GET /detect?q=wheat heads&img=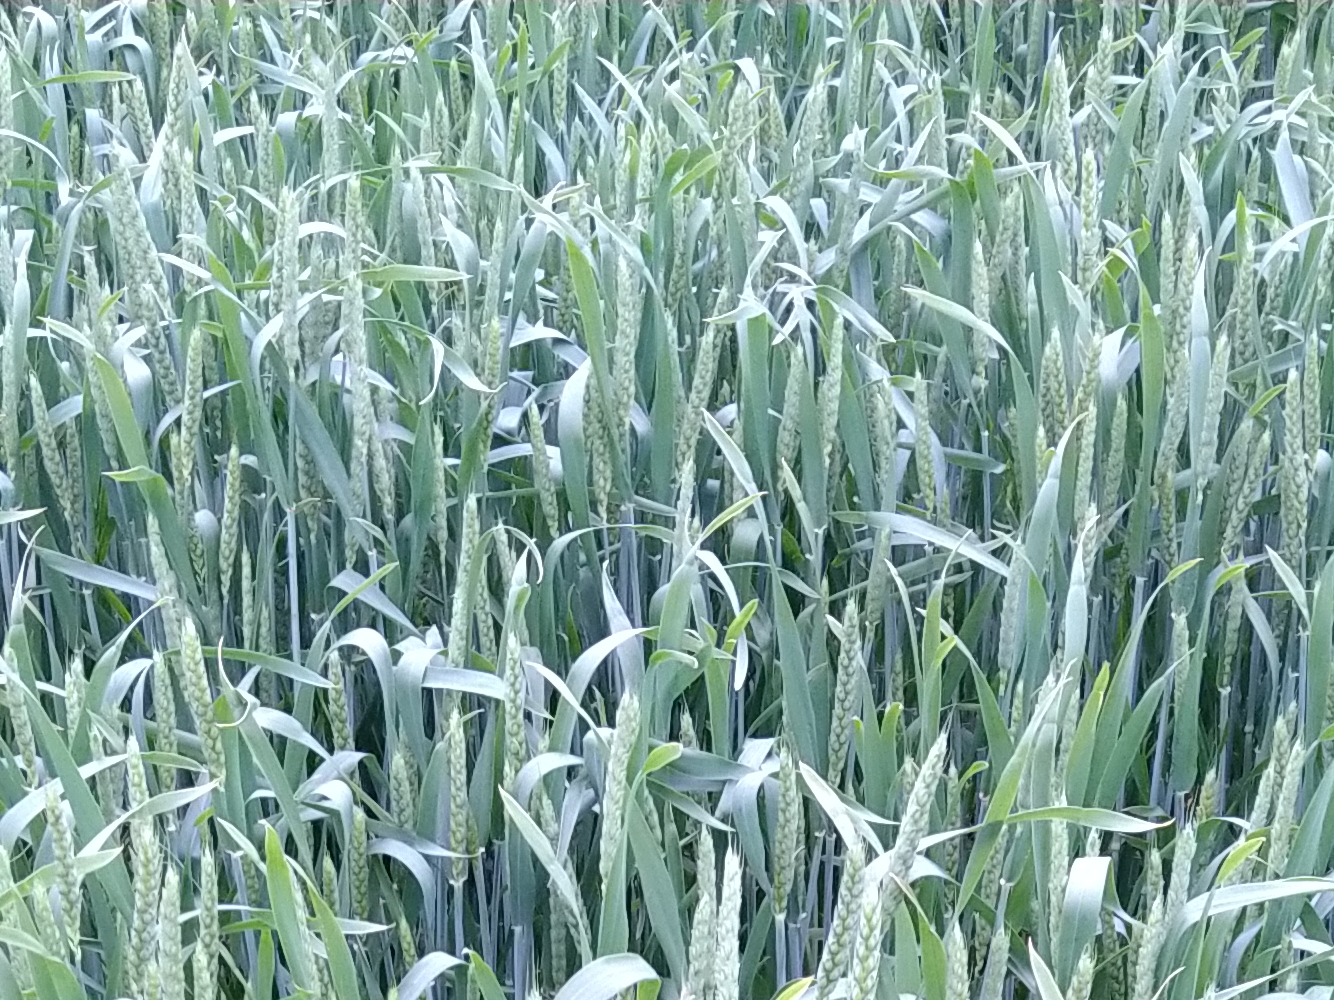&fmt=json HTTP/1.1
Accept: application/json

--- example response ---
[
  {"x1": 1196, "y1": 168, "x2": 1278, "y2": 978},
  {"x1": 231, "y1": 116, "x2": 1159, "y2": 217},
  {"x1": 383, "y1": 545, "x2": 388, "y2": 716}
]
[
  {"x1": 1053, "y1": 59, "x2": 1077, "y2": 188},
  {"x1": 1110, "y1": 554, "x2": 1124, "y2": 604},
  {"x1": 770, "y1": 90, "x2": 785, "y2": 151},
  {"x1": 351, "y1": 808, "x2": 369, "y2": 919},
  {"x1": 200, "y1": 852, "x2": 219, "y2": 965},
  {"x1": 139, "y1": 289, "x2": 182, "y2": 409},
  {"x1": 160, "y1": 868, "x2": 187, "y2": 1000},
  {"x1": 714, "y1": 286, "x2": 733, "y2": 376},
  {"x1": 641, "y1": 783, "x2": 662, "y2": 846},
  {"x1": 658, "y1": 120, "x2": 673, "y2": 162},
  {"x1": 1122, "y1": 493, "x2": 1154, "y2": 572},
  {"x1": 416, "y1": 182, "x2": 436, "y2": 296},
  {"x1": 1076, "y1": 336, "x2": 1102, "y2": 416},
  {"x1": 186, "y1": 10, "x2": 198, "y2": 41},
  {"x1": 346, "y1": 179, "x2": 362, "y2": 274},
  {"x1": 376, "y1": 388, "x2": 391, "y2": 447},
  {"x1": 159, "y1": 49, "x2": 188, "y2": 140},
  {"x1": 821, "y1": 447, "x2": 842, "y2": 509},
  {"x1": 391, "y1": 755, "x2": 414, "y2": 830},
  {"x1": 1160, "y1": 211, "x2": 1175, "y2": 336},
  {"x1": 1314, "y1": 227, "x2": 1332, "y2": 294},
  {"x1": 398, "y1": 918, "x2": 424, "y2": 1000},
  {"x1": 528, "y1": 403, "x2": 560, "y2": 534},
  {"x1": 1121, "y1": 0, "x2": 1135, "y2": 60},
  {"x1": 120, "y1": 81, "x2": 139, "y2": 127},
  {"x1": 1049, "y1": 818, "x2": 1068, "y2": 936},
  {"x1": 421, "y1": 114, "x2": 434, "y2": 153},
  {"x1": 180, "y1": 150, "x2": 199, "y2": 292},
  {"x1": 1194, "y1": 772, "x2": 1219, "y2": 865},
  {"x1": 915, "y1": 376, "x2": 934, "y2": 507},
  {"x1": 565, "y1": 0, "x2": 581, "y2": 62},
  {"x1": 327, "y1": 654, "x2": 354, "y2": 768},
  {"x1": 1010, "y1": 197, "x2": 1025, "y2": 327},
  {"x1": 576, "y1": 172, "x2": 590, "y2": 239},
  {"x1": 867, "y1": 528, "x2": 891, "y2": 626},
  {"x1": 66, "y1": 418, "x2": 85, "y2": 528},
  {"x1": 343, "y1": 278, "x2": 364, "y2": 360},
  {"x1": 941, "y1": 929, "x2": 970, "y2": 1000},
  {"x1": 1028, "y1": 0, "x2": 1043, "y2": 75},
  {"x1": 834, "y1": 879, "x2": 882, "y2": 1000},
  {"x1": 790, "y1": 98, "x2": 818, "y2": 201},
  {"x1": 971, "y1": 240, "x2": 991, "y2": 374},
  {"x1": 601, "y1": 694, "x2": 641, "y2": 881},
  {"x1": 0, "y1": 846, "x2": 39, "y2": 1000},
  {"x1": 774, "y1": 753, "x2": 797, "y2": 902},
  {"x1": 775, "y1": 347, "x2": 804, "y2": 484},
  {"x1": 388, "y1": 0, "x2": 405, "y2": 42},
  {"x1": 956, "y1": 93, "x2": 981, "y2": 178},
  {"x1": 1084, "y1": 826, "x2": 1100, "y2": 859},
  {"x1": 1276, "y1": 39, "x2": 1293, "y2": 100},
  {"x1": 827, "y1": 602, "x2": 862, "y2": 786},
  {"x1": 925, "y1": 74, "x2": 950, "y2": 181},
  {"x1": 303, "y1": 251, "x2": 324, "y2": 355},
  {"x1": 1237, "y1": 48, "x2": 1259, "y2": 101},
  {"x1": 139, "y1": 965, "x2": 163, "y2": 1000},
  {"x1": 1036, "y1": 423, "x2": 1049, "y2": 489},
  {"x1": 913, "y1": 227, "x2": 929, "y2": 284},
  {"x1": 194, "y1": 951, "x2": 214, "y2": 1000},
  {"x1": 450, "y1": 60, "x2": 463, "y2": 127},
  {"x1": 164, "y1": 141, "x2": 180, "y2": 218},
  {"x1": 220, "y1": 443, "x2": 241, "y2": 586},
  {"x1": 727, "y1": 444, "x2": 730, "y2": 513},
  {"x1": 152, "y1": 655, "x2": 177, "y2": 790},
  {"x1": 868, "y1": 19, "x2": 886, "y2": 107},
  {"x1": 713, "y1": 850, "x2": 743, "y2": 1000},
  {"x1": 943, "y1": 768, "x2": 961, "y2": 876},
  {"x1": 677, "y1": 330, "x2": 720, "y2": 467},
  {"x1": 369, "y1": 409, "x2": 395, "y2": 518},
  {"x1": 950, "y1": 0, "x2": 959, "y2": 34},
  {"x1": 185, "y1": 513, "x2": 207, "y2": 590},
  {"x1": 671, "y1": 0, "x2": 687, "y2": 32},
  {"x1": 495, "y1": 523, "x2": 513, "y2": 595},
  {"x1": 1053, "y1": 687, "x2": 1079, "y2": 800},
  {"x1": 1145, "y1": 857, "x2": 1164, "y2": 919},
  {"x1": 604, "y1": 478, "x2": 622, "y2": 545},
  {"x1": 1177, "y1": 177, "x2": 1195, "y2": 258},
  {"x1": 674, "y1": 166, "x2": 684, "y2": 248},
  {"x1": 611, "y1": 409, "x2": 629, "y2": 467},
  {"x1": 170, "y1": 429, "x2": 191, "y2": 517},
  {"x1": 320, "y1": 263, "x2": 336, "y2": 333},
  {"x1": 1, "y1": 328, "x2": 16, "y2": 473},
  {"x1": 461, "y1": 959, "x2": 481, "y2": 1000},
  {"x1": 1270, "y1": 558, "x2": 1294, "y2": 645},
  {"x1": 259, "y1": 606, "x2": 274, "y2": 706},
  {"x1": 449, "y1": 712, "x2": 467, "y2": 876},
  {"x1": 732, "y1": 465, "x2": 746, "y2": 521},
  {"x1": 983, "y1": 89, "x2": 1005, "y2": 166},
  {"x1": 1221, "y1": 434, "x2": 1271, "y2": 555},
  {"x1": 297, "y1": 432, "x2": 318, "y2": 529},
  {"x1": 1281, "y1": 370, "x2": 1306, "y2": 523},
  {"x1": 33, "y1": 887, "x2": 66, "y2": 960},
  {"x1": 30, "y1": 374, "x2": 70, "y2": 508},
  {"x1": 1264, "y1": 254, "x2": 1291, "y2": 329},
  {"x1": 181, "y1": 619, "x2": 226, "y2": 783},
  {"x1": 999, "y1": 551, "x2": 1023, "y2": 676},
  {"x1": 842, "y1": 56, "x2": 863, "y2": 128},
  {"x1": 556, "y1": 244, "x2": 576, "y2": 336},
  {"x1": 1160, "y1": 472, "x2": 1176, "y2": 570},
  {"x1": 1007, "y1": 409, "x2": 1022, "y2": 506},
  {"x1": 313, "y1": 942, "x2": 345, "y2": 1000},
  {"x1": 1, "y1": 233, "x2": 13, "y2": 311},
  {"x1": 1172, "y1": 2, "x2": 1187, "y2": 54},
  {"x1": 1085, "y1": 110, "x2": 1108, "y2": 154},
  {"x1": 731, "y1": 418, "x2": 744, "y2": 455},
  {"x1": 1073, "y1": 405, "x2": 1097, "y2": 527},
  {"x1": 1198, "y1": 337, "x2": 1231, "y2": 480},
  {"x1": 1131, "y1": 898, "x2": 1166, "y2": 1000},
  {"x1": 334, "y1": 49, "x2": 347, "y2": 81},
  {"x1": 1079, "y1": 503, "x2": 1096, "y2": 581},
  {"x1": 1236, "y1": 769, "x2": 1275, "y2": 881},
  {"x1": 1102, "y1": 911, "x2": 1124, "y2": 1000},
  {"x1": 279, "y1": 0, "x2": 296, "y2": 27},
  {"x1": 81, "y1": 148, "x2": 93, "y2": 245},
  {"x1": 710, "y1": 84, "x2": 747, "y2": 222},
  {"x1": 1124, "y1": 911, "x2": 1143, "y2": 999},
  {"x1": 291, "y1": 876, "x2": 320, "y2": 1000},
  {"x1": 820, "y1": 315, "x2": 844, "y2": 453},
  {"x1": 624, "y1": 230, "x2": 638, "y2": 275},
  {"x1": 669, "y1": 243, "x2": 688, "y2": 307},
  {"x1": 1218, "y1": 423, "x2": 1252, "y2": 537},
  {"x1": 1142, "y1": 71, "x2": 1164, "y2": 150},
  {"x1": 964, "y1": 0, "x2": 978, "y2": 66},
  {"x1": 70, "y1": 126, "x2": 79, "y2": 181},
  {"x1": 447, "y1": 496, "x2": 480, "y2": 667},
  {"x1": 1039, "y1": 347, "x2": 1052, "y2": 428},
  {"x1": 914, "y1": 90, "x2": 925, "y2": 142},
  {"x1": 1084, "y1": 66, "x2": 1099, "y2": 107},
  {"x1": 1167, "y1": 829, "x2": 1195, "y2": 922},
  {"x1": 875, "y1": 390, "x2": 894, "y2": 480},
  {"x1": 1010, "y1": 679, "x2": 1025, "y2": 741},
  {"x1": 45, "y1": 786, "x2": 82, "y2": 946},
  {"x1": 241, "y1": 853, "x2": 263, "y2": 912},
  {"x1": 346, "y1": 74, "x2": 364, "y2": 129},
  {"x1": 721, "y1": 0, "x2": 736, "y2": 59},
  {"x1": 504, "y1": 636, "x2": 526, "y2": 780},
  {"x1": 4, "y1": 648, "x2": 35, "y2": 777},
  {"x1": 124, "y1": 939, "x2": 139, "y2": 1000},
  {"x1": 738, "y1": 160, "x2": 756, "y2": 260},
  {"x1": 613, "y1": 255, "x2": 639, "y2": 411},
  {"x1": 322, "y1": 875, "x2": 339, "y2": 917},
  {"x1": 220, "y1": 156, "x2": 235, "y2": 196},
  {"x1": 1045, "y1": 534, "x2": 1054, "y2": 573},
  {"x1": 586, "y1": 373, "x2": 613, "y2": 510},
  {"x1": 1172, "y1": 617, "x2": 1185, "y2": 702},
  {"x1": 973, "y1": 826, "x2": 1009, "y2": 961},
  {"x1": 242, "y1": 542, "x2": 255, "y2": 647},
  {"x1": 882, "y1": 736, "x2": 947, "y2": 910},
  {"x1": 479, "y1": 219, "x2": 505, "y2": 369},
  {"x1": 1235, "y1": 246, "x2": 1257, "y2": 374},
  {"x1": 815, "y1": 73, "x2": 833, "y2": 154},
  {"x1": 1271, "y1": 715, "x2": 1292, "y2": 802},
  {"x1": 431, "y1": 424, "x2": 446, "y2": 549},
  {"x1": 551, "y1": 886, "x2": 565, "y2": 992},
  {"x1": 554, "y1": 25, "x2": 565, "y2": 124},
  {"x1": 125, "y1": 735, "x2": 151, "y2": 836},
  {"x1": 0, "y1": 55, "x2": 14, "y2": 181},
  {"x1": 479, "y1": 217, "x2": 492, "y2": 258},
  {"x1": 885, "y1": 239, "x2": 907, "y2": 330},
  {"x1": 258, "y1": 117, "x2": 275, "y2": 242},
  {"x1": 699, "y1": 261, "x2": 718, "y2": 319},
  {"x1": 1325, "y1": 658, "x2": 1334, "y2": 756},
  {"x1": 1130, "y1": 109, "x2": 1144, "y2": 153},
  {"x1": 980, "y1": 930, "x2": 1009, "y2": 1000},
  {"x1": 283, "y1": 194, "x2": 300, "y2": 357},
  {"x1": 1219, "y1": 579, "x2": 1243, "y2": 685},
  {"x1": 678, "y1": 460, "x2": 696, "y2": 545},
  {"x1": 1040, "y1": 958, "x2": 1095, "y2": 1000},
  {"x1": 111, "y1": 170, "x2": 171, "y2": 310},
  {"x1": 1304, "y1": 333, "x2": 1320, "y2": 460},
  {"x1": 274, "y1": 190, "x2": 292, "y2": 311},
  {"x1": 687, "y1": 897, "x2": 713, "y2": 1000},
  {"x1": 1168, "y1": 237, "x2": 1199, "y2": 373},
  {"x1": 569, "y1": 199, "x2": 580, "y2": 227},
  {"x1": 1079, "y1": 150, "x2": 1101, "y2": 293},
  {"x1": 388, "y1": 153, "x2": 403, "y2": 223},
  {"x1": 132, "y1": 80, "x2": 154, "y2": 155},
  {"x1": 988, "y1": 194, "x2": 1016, "y2": 298},
  {"x1": 1099, "y1": 32, "x2": 1113, "y2": 101},
  {"x1": 61, "y1": 665, "x2": 81, "y2": 743},
  {"x1": 633, "y1": 282, "x2": 648, "y2": 343},
  {"x1": 581, "y1": 382, "x2": 594, "y2": 471},
  {"x1": 1280, "y1": 455, "x2": 1297, "y2": 566},
  {"x1": 1104, "y1": 393, "x2": 1128, "y2": 528},
  {"x1": 147, "y1": 512, "x2": 183, "y2": 647},
  {"x1": 508, "y1": 96, "x2": 520, "y2": 157},
  {"x1": 129, "y1": 825, "x2": 164, "y2": 995},
  {"x1": 1050, "y1": 333, "x2": 1069, "y2": 437},
  {"x1": 249, "y1": 87, "x2": 262, "y2": 123},
  {"x1": 831, "y1": 166, "x2": 865, "y2": 288},
  {"x1": 1049, "y1": 874, "x2": 1068, "y2": 973},
  {"x1": 181, "y1": 329, "x2": 204, "y2": 464},
  {"x1": 1154, "y1": 358, "x2": 1192, "y2": 483},
  {"x1": 742, "y1": 89, "x2": 749, "y2": 153},
  {"x1": 0, "y1": 73, "x2": 5, "y2": 184},
  {"x1": 812, "y1": 845, "x2": 867, "y2": 1000},
  {"x1": 1268, "y1": 744, "x2": 1305, "y2": 875},
  {"x1": 346, "y1": 369, "x2": 366, "y2": 560},
  {"x1": 241, "y1": 19, "x2": 254, "y2": 81},
  {"x1": 865, "y1": 382, "x2": 881, "y2": 467},
  {"x1": 150, "y1": 1, "x2": 171, "y2": 70},
  {"x1": 463, "y1": 113, "x2": 480, "y2": 212},
  {"x1": 639, "y1": 129, "x2": 653, "y2": 205},
  {"x1": 478, "y1": 321, "x2": 503, "y2": 458},
  {"x1": 202, "y1": 0, "x2": 224, "y2": 65},
  {"x1": 487, "y1": 1, "x2": 498, "y2": 53},
  {"x1": 108, "y1": 201, "x2": 135, "y2": 300},
  {"x1": 474, "y1": 565, "x2": 496, "y2": 665},
  {"x1": 1246, "y1": 148, "x2": 1261, "y2": 208},
  {"x1": 718, "y1": 263, "x2": 726, "y2": 289},
  {"x1": 616, "y1": 153, "x2": 630, "y2": 224},
  {"x1": 84, "y1": 341, "x2": 121, "y2": 465},
  {"x1": 434, "y1": 92, "x2": 446, "y2": 162},
  {"x1": 90, "y1": 731, "x2": 114, "y2": 819},
  {"x1": 1112, "y1": 172, "x2": 1127, "y2": 248},
  {"x1": 430, "y1": 181, "x2": 442, "y2": 227},
  {"x1": 202, "y1": 332, "x2": 222, "y2": 437},
  {"x1": 653, "y1": 0, "x2": 670, "y2": 59},
  {"x1": 697, "y1": 825, "x2": 715, "y2": 905}
]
